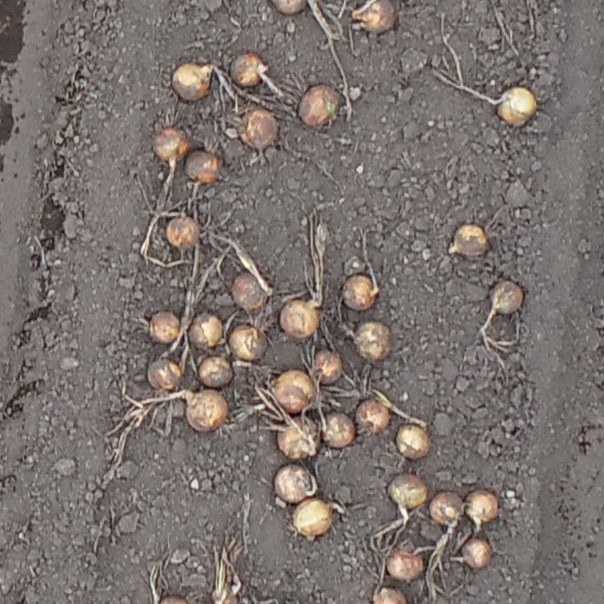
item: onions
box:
[296,83,340,127]
[182,388,225,429]
[197,353,232,385]
[272,0,304,13]
[386,472,427,508]
[292,496,333,536]
[461,536,491,565]
[341,272,375,310]
[495,85,535,124]
[354,395,389,432]
[393,423,428,457]
[273,368,313,411]
[171,61,210,99]
[228,273,267,310]
[320,411,354,447]
[449,222,487,259]
[386,550,422,578]
[229,52,262,87]
[229,322,264,359]
[190,313,223,347]
[150,127,188,161]
[148,358,181,388]
[274,463,313,502]
[429,493,460,524]
[275,421,317,458]
[278,297,320,336]
[311,350,342,381]
[352,320,391,360]
[355,0,393,32]
[372,584,407,604]
[185,149,221,181]
[464,490,498,521]
[157,594,186,604]
[148,310,178,342]
[165,216,198,246]
[241,109,277,146]
[488,282,522,315]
